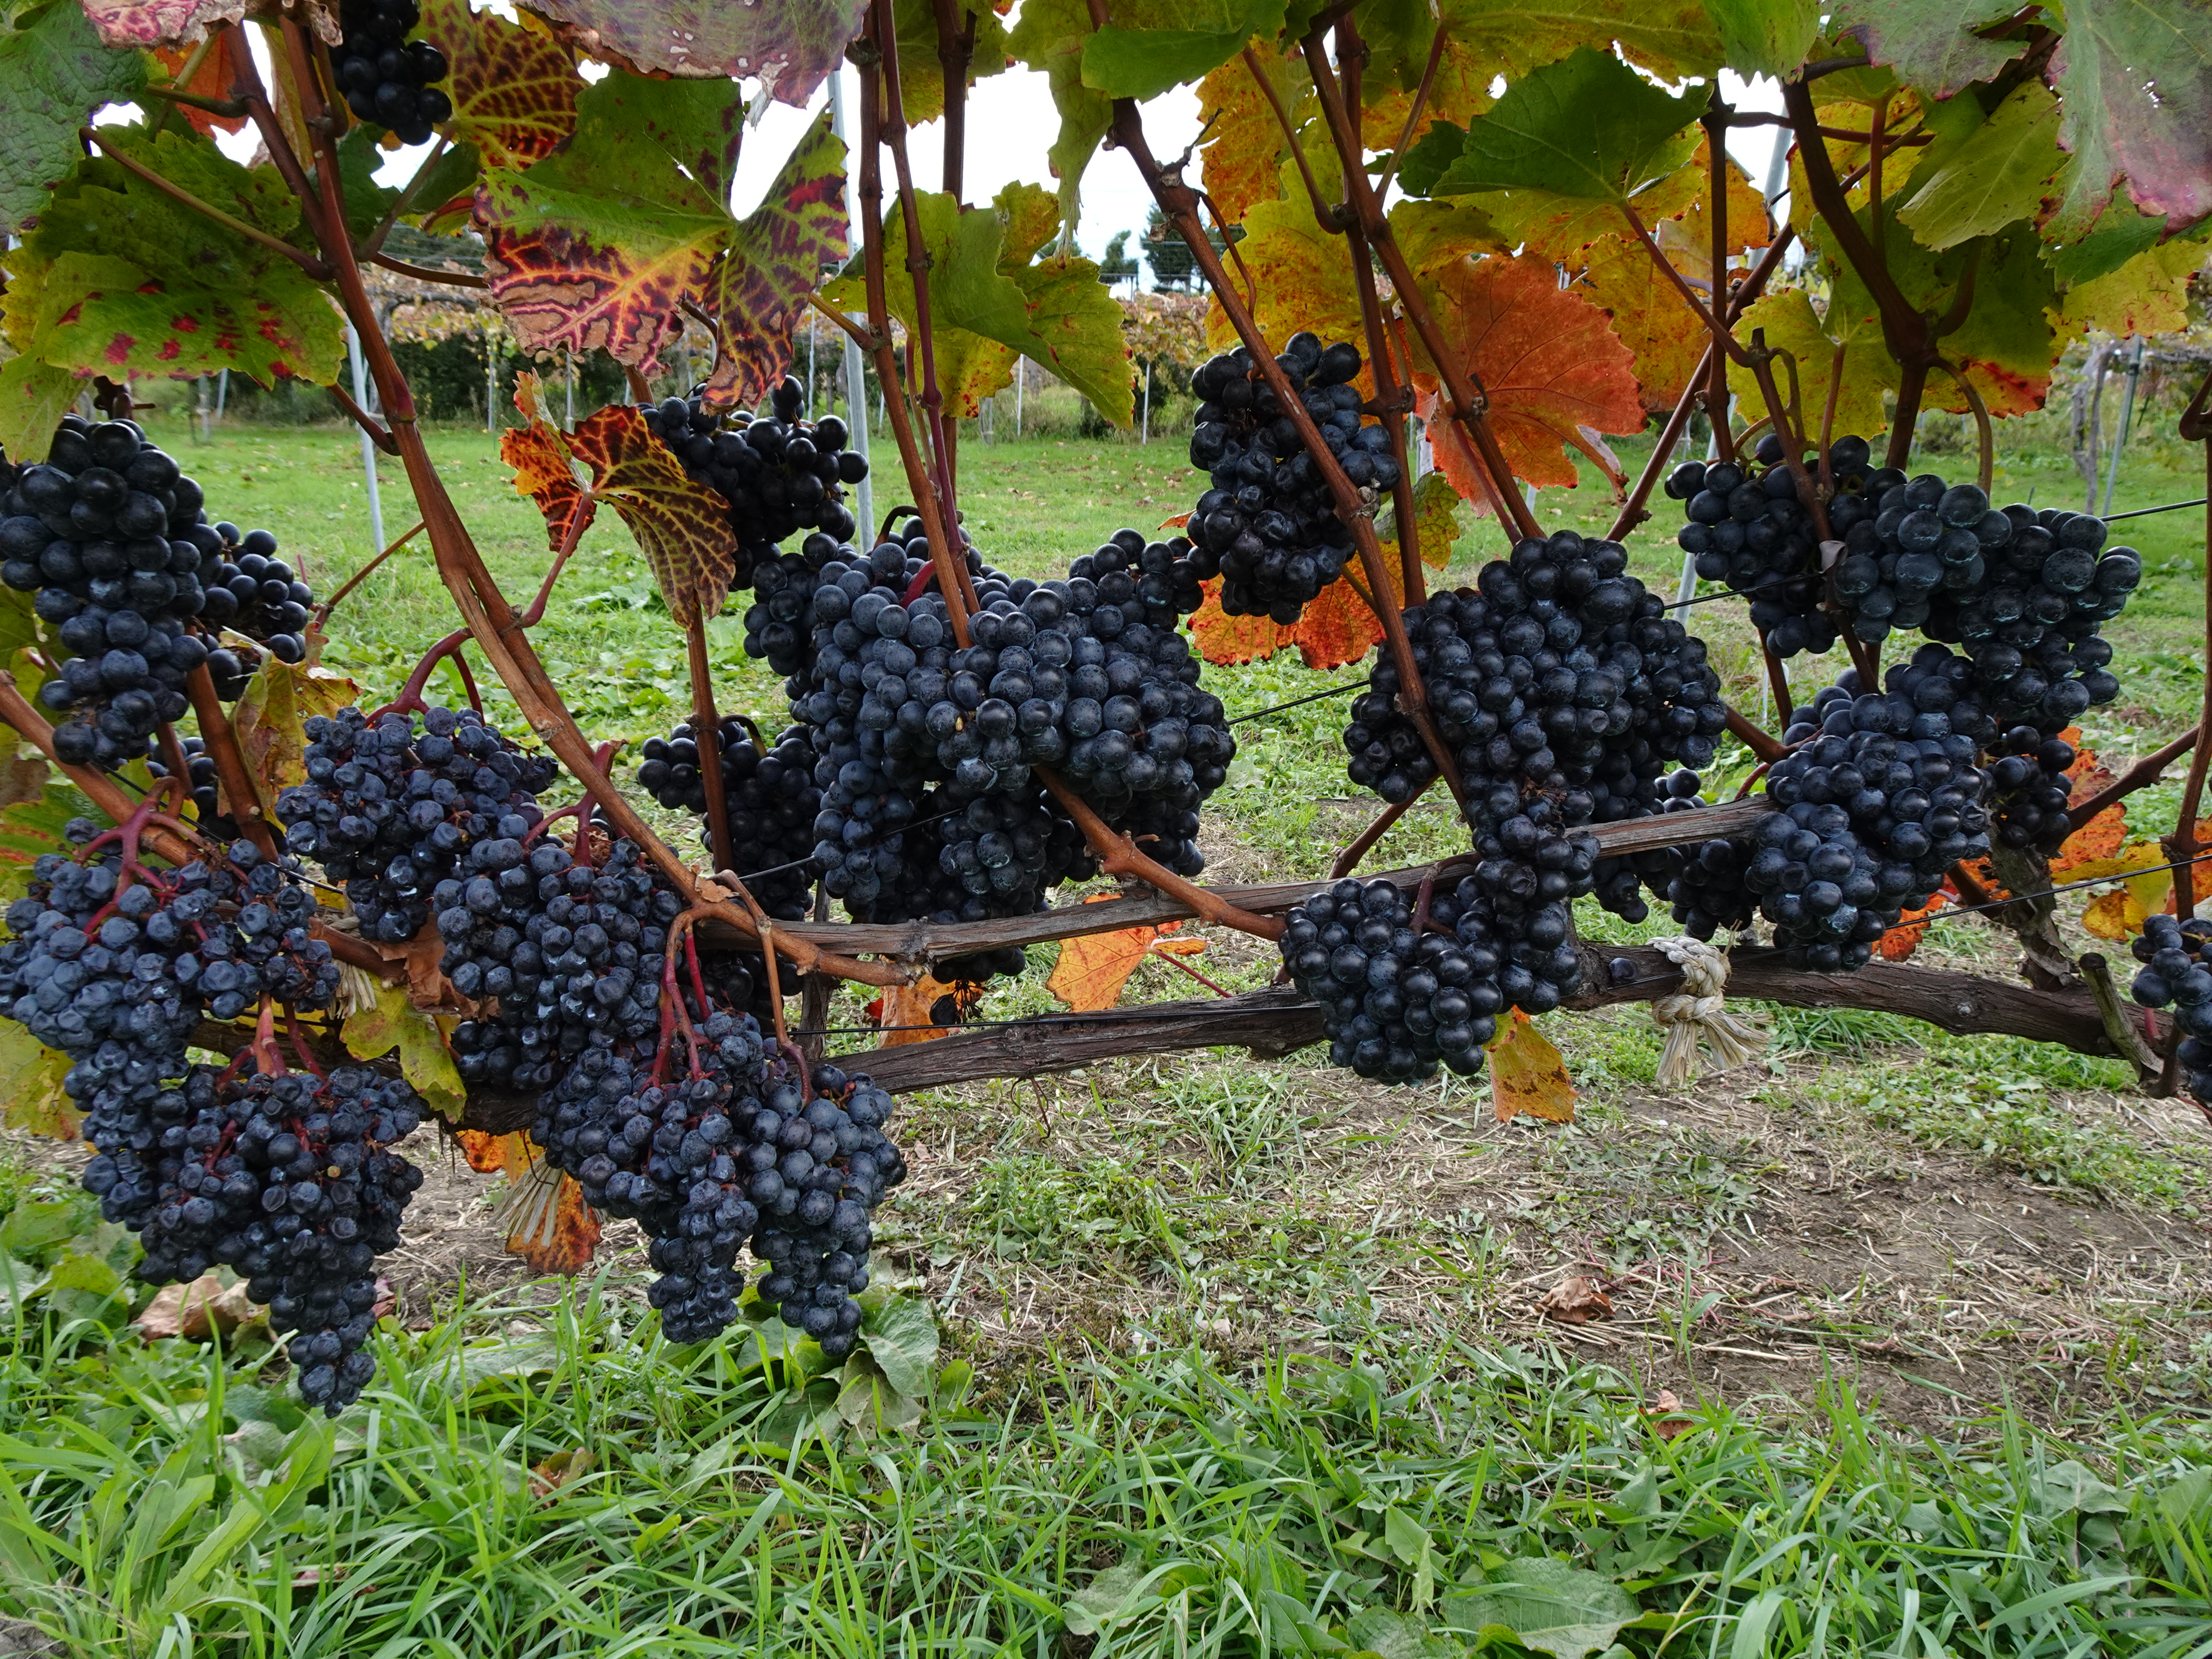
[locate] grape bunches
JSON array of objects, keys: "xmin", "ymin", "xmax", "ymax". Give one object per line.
[
  {"xmin": 123, "ymin": 979, "xmax": 202, "ymax": 1069},
  {"xmin": 1341, "ymin": 587, "xmax": 1478, "ymax": 804},
  {"xmin": 1628, "ymin": 772, "xmax": 1765, "ymax": 935},
  {"xmin": 1828, "ymin": 431, "xmax": 2146, "ymax": 652},
  {"xmin": 1170, "ymin": 330, "xmax": 1399, "ymax": 626},
  {"xmin": 448, "ymin": 1018, "xmax": 582, "ymax": 1099},
  {"xmin": 1425, "ymin": 530, "xmax": 1647, "ymax": 1013},
  {"xmin": 636, "ymin": 708, "xmax": 824, "ymax": 1005},
  {"xmin": 211, "ymin": 516, "xmax": 321, "ymax": 691},
  {"xmin": 149, "ymin": 729, "xmax": 257, "ymax": 837},
  {"xmin": 1277, "ymin": 875, "xmax": 1440, "ymax": 1093},
  {"xmin": 734, "ymin": 514, "xmax": 970, "ymax": 961},
  {"xmin": 1399, "ymin": 934, "xmax": 1512, "ymax": 1089},
  {"xmin": 325, "ymin": 0, "xmax": 456, "ymax": 148},
  {"xmin": 1601, "ymin": 575, "xmax": 1742, "ymax": 775},
  {"xmin": 1747, "ymin": 646, "xmax": 2009, "ymax": 972},
  {"xmin": 690, "ymin": 1005, "xmax": 785, "ymax": 1105},
  {"xmin": 1, "ymin": 406, "xmax": 246, "ymax": 768},
  {"xmin": 964, "ymin": 526, "xmax": 1248, "ymax": 880},
  {"xmin": 217, "ymin": 1070, "xmax": 426, "ymax": 1423},
  {"xmin": 0, "ymin": 800, "xmax": 131, "ymax": 1051},
  {"xmin": 631, "ymin": 370, "xmax": 870, "ymax": 555},
  {"xmin": 126, "ymin": 841, "xmax": 345, "ymax": 1022},
  {"xmin": 1971, "ymin": 636, "xmax": 2124, "ymax": 855},
  {"xmin": 67, "ymin": 1050, "xmax": 164, "ymax": 1231},
  {"xmin": 738, "ymin": 1057, "xmax": 917, "ymax": 1361},
  {"xmin": 1661, "ymin": 426, "xmax": 1838, "ymax": 660},
  {"xmin": 529, "ymin": 1044, "xmax": 759, "ymax": 1350},
  {"xmin": 274, "ymin": 705, "xmax": 558, "ymax": 943},
  {"xmin": 922, "ymin": 793, "xmax": 1077, "ymax": 1030},
  {"xmin": 122, "ymin": 1064, "xmax": 248, "ymax": 1296},
  {"xmin": 433, "ymin": 814, "xmax": 685, "ymax": 1036},
  {"xmin": 2131, "ymin": 904, "xmax": 2212, "ymax": 1137}
]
